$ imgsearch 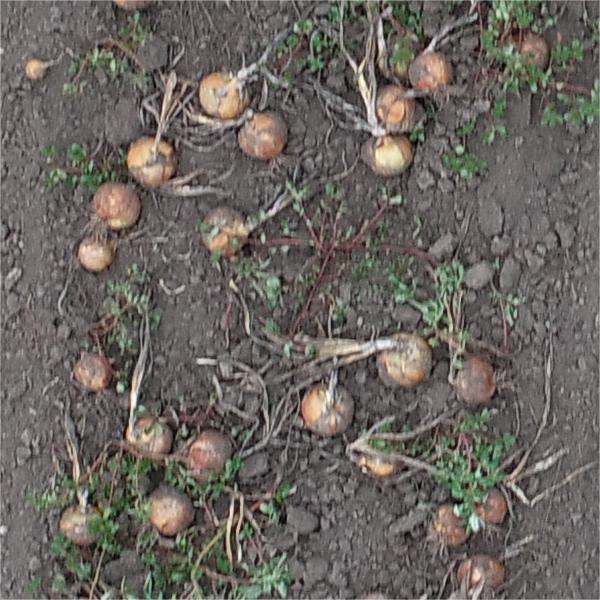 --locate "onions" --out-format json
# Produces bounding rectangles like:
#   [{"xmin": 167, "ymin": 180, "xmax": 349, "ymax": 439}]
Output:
[
  {"xmin": 113, "ymin": 0, "xmax": 153, "ymax": 10},
  {"xmin": 354, "ymin": 440, "xmax": 397, "ymax": 477},
  {"xmin": 147, "ymin": 488, "xmax": 192, "ymax": 533},
  {"xmin": 370, "ymin": 133, "xmax": 410, "ymax": 172},
  {"xmin": 182, "ymin": 428, "xmax": 231, "ymax": 475},
  {"xmin": 429, "ymin": 504, "xmax": 470, "ymax": 545},
  {"xmin": 199, "ymin": 204, "xmax": 249, "ymax": 256},
  {"xmin": 299, "ymin": 382, "xmax": 351, "ymax": 431},
  {"xmin": 452, "ymin": 355, "xmax": 494, "ymax": 402},
  {"xmin": 376, "ymin": 87, "xmax": 412, "ymax": 127},
  {"xmin": 476, "ymin": 488, "xmax": 510, "ymax": 524},
  {"xmin": 77, "ymin": 233, "xmax": 114, "ymax": 270},
  {"xmin": 199, "ymin": 72, "xmax": 245, "ymax": 116},
  {"xmin": 504, "ymin": 29, "xmax": 547, "ymax": 73},
  {"xmin": 91, "ymin": 181, "xmax": 137, "ymax": 226},
  {"xmin": 59, "ymin": 503, "xmax": 100, "ymax": 544},
  {"xmin": 128, "ymin": 414, "xmax": 169, "ymax": 453},
  {"xmin": 23, "ymin": 55, "xmax": 49, "ymax": 80},
  {"xmin": 409, "ymin": 49, "xmax": 451, "ymax": 90},
  {"xmin": 71, "ymin": 354, "xmax": 111, "ymax": 392},
  {"xmin": 454, "ymin": 557, "xmax": 503, "ymax": 594},
  {"xmin": 236, "ymin": 110, "xmax": 285, "ymax": 156},
  {"xmin": 127, "ymin": 136, "xmax": 174, "ymax": 184},
  {"xmin": 383, "ymin": 40, "xmax": 416, "ymax": 75},
  {"xmin": 379, "ymin": 334, "xmax": 429, "ymax": 385}
]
